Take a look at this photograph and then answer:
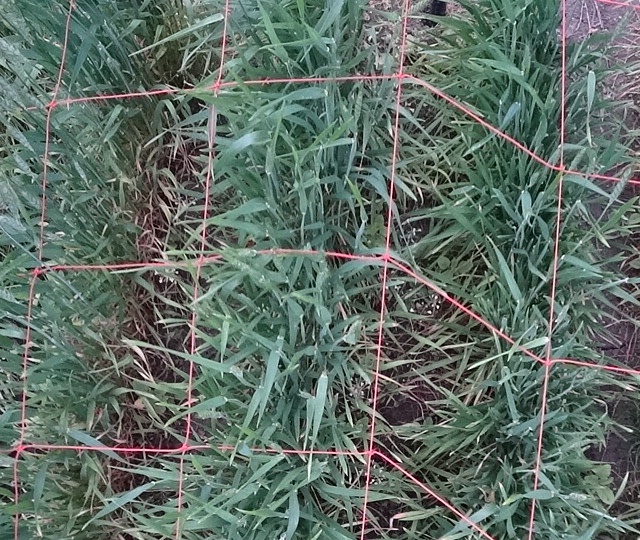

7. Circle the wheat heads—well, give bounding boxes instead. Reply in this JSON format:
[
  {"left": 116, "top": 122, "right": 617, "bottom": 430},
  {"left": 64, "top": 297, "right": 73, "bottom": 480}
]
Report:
[
  {"left": 571, "top": 493, "right": 590, "bottom": 503},
  {"left": 216, "top": 296, "right": 232, "bottom": 316},
  {"left": 588, "top": 155, "right": 599, "bottom": 178},
  {"left": 571, "top": 148, "right": 586, "bottom": 170},
  {"left": 394, "top": 0, "right": 429, "bottom": 20},
  {"left": 30, "top": 93, "right": 48, "bottom": 111},
  {"left": 606, "top": 10, "right": 626, "bottom": 48},
  {"left": 230, "top": 256, "right": 255, "bottom": 278},
  {"left": 548, "top": 144, "right": 567, "bottom": 165},
  {"left": 11, "top": 125, "right": 36, "bottom": 152},
  {"left": 0, "top": 78, "right": 23, "bottom": 106},
  {"left": 203, "top": 411, "right": 220, "bottom": 419},
  {"left": 7, "top": 8, "right": 32, "bottom": 40},
  {"left": 0, "top": 290, "right": 18, "bottom": 303},
  {"left": 24, "top": 189, "right": 47, "bottom": 208},
  {"left": 313, "top": 157, "right": 321, "bottom": 173},
  {"left": 3, "top": 181, "right": 20, "bottom": 215},
  {"left": 4, "top": 46, "right": 24, "bottom": 74},
  {"left": 27, "top": 110, "right": 48, "bottom": 121},
  {"left": 73, "top": 161, "right": 86, "bottom": 183},
  {"left": 579, "top": 369, "right": 596, "bottom": 381},
  {"left": 11, "top": 151, "right": 31, "bottom": 178},
  {"left": 233, "top": 243, "right": 257, "bottom": 258},
  {"left": 607, "top": 167, "right": 633, "bottom": 199},
  {"left": 3, "top": 219, "right": 27, "bottom": 230},
  {"left": 352, "top": 89, "right": 365, "bottom": 120}
]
